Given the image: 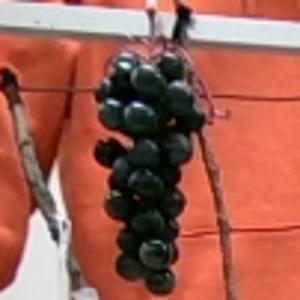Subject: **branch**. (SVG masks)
<instances>
[{
	"mask_svg": "<svg viewBox=\"0 0 300 300\" xmlns=\"http://www.w3.org/2000/svg\"><path fill=\"white\" fill-rule=\"evenodd\" d=\"M205 127L195 134L200 150L201 162L204 166L210 197L216 214V225L219 228L218 247L222 263L224 282V299L238 300L237 275L235 269V253L231 239L232 227L227 217L224 191L220 176V166L215 163V151L212 150L205 134Z\"/></svg>",
	"mask_w": 300,
	"mask_h": 300,
	"instance_id": "325d2c04",
	"label": "branch"
},
{
	"mask_svg": "<svg viewBox=\"0 0 300 300\" xmlns=\"http://www.w3.org/2000/svg\"><path fill=\"white\" fill-rule=\"evenodd\" d=\"M0 94L6 100L7 110L11 115L20 165L40 208L50 238L56 247H59L66 266L72 298L73 300H102L98 290L89 284L60 221L54 198L44 184L40 167L32 150L27 108L24 97L21 95L20 77L10 67L3 64H0Z\"/></svg>",
	"mask_w": 300,
	"mask_h": 300,
	"instance_id": "30e6481e",
	"label": "branch"
},
{
	"mask_svg": "<svg viewBox=\"0 0 300 300\" xmlns=\"http://www.w3.org/2000/svg\"><path fill=\"white\" fill-rule=\"evenodd\" d=\"M174 9V21L171 30V46L173 53H180L185 57L189 74L186 78L188 86L193 88L200 98L199 88L196 84L195 70L189 61L190 38L188 35L194 9L184 4L181 0H171Z\"/></svg>",
	"mask_w": 300,
	"mask_h": 300,
	"instance_id": "170604dd",
	"label": "branch"
}]
</instances>
